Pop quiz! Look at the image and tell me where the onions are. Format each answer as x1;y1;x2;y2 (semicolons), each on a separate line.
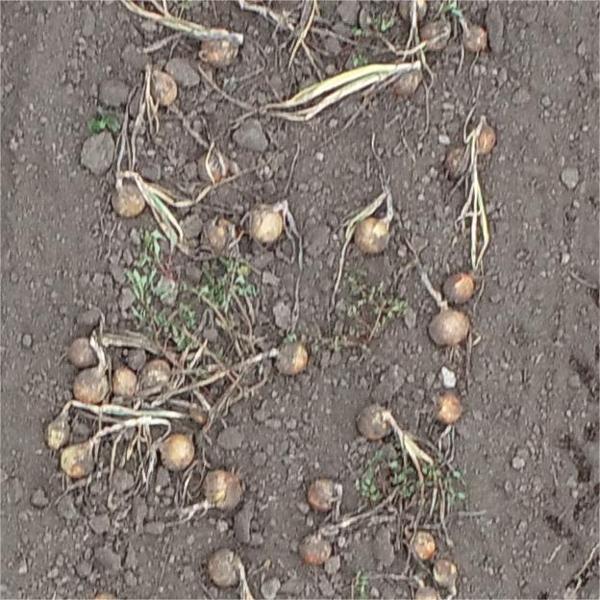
350;211;389;253
461;25;488;52
273;339;308;374
205;471;236;503
110;174;143;216
207;549;245;585
465;121;496;153
57;442;94;478
110;367;138;397
388;64;421;97
409;531;439;559
66;339;96;367
202;214;235;253
415;585;441;600
125;347;149;371
396;0;429;21
431;392;462;422
149;71;177;104
429;308;466;345
354;404;390;439
441;145;467;178
139;360;169;392
92;590;115;600
420;20;451;50
43;419;72;448
444;269;476;303
159;432;193;468
298;535;329;564
246;205;283;243
304;478;337;511
200;30;237;68
74;368;107;404
189;399;209;423
201;151;228;182
434;559;457;586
